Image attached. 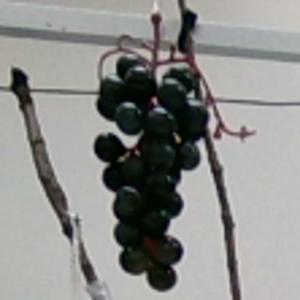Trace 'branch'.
I'll use <instances>...</instances> for the list:
<instances>
[{"label": "branch", "instance_id": "1", "mask_svg": "<svg viewBox=\"0 0 300 300\" xmlns=\"http://www.w3.org/2000/svg\"><path fill=\"white\" fill-rule=\"evenodd\" d=\"M29 82V75L21 67L11 64L9 91L14 96L22 117L37 179L59 223L62 235L75 254L83 279V290L91 300H115L110 286L98 276L83 236L71 217L69 200L52 166L47 140L42 134L41 122L36 112V102L31 96Z\"/></svg>", "mask_w": 300, "mask_h": 300}, {"label": "branch", "instance_id": "2", "mask_svg": "<svg viewBox=\"0 0 300 300\" xmlns=\"http://www.w3.org/2000/svg\"><path fill=\"white\" fill-rule=\"evenodd\" d=\"M201 140L204 145L207 166L216 191L220 211L226 270L229 275V295L231 300H242L240 261L236 253V222L231 210L228 188L225 186V166L221 162L209 125L204 131Z\"/></svg>", "mask_w": 300, "mask_h": 300}, {"label": "branch", "instance_id": "3", "mask_svg": "<svg viewBox=\"0 0 300 300\" xmlns=\"http://www.w3.org/2000/svg\"><path fill=\"white\" fill-rule=\"evenodd\" d=\"M180 14V26L175 40V48L183 55V61L188 67L197 69L201 76L196 60V48L193 35L198 32L199 15L191 7L187 0H176Z\"/></svg>", "mask_w": 300, "mask_h": 300}, {"label": "branch", "instance_id": "4", "mask_svg": "<svg viewBox=\"0 0 300 300\" xmlns=\"http://www.w3.org/2000/svg\"><path fill=\"white\" fill-rule=\"evenodd\" d=\"M193 97L194 99H199L204 102V92H203L202 83L197 90L193 91Z\"/></svg>", "mask_w": 300, "mask_h": 300}]
</instances>
